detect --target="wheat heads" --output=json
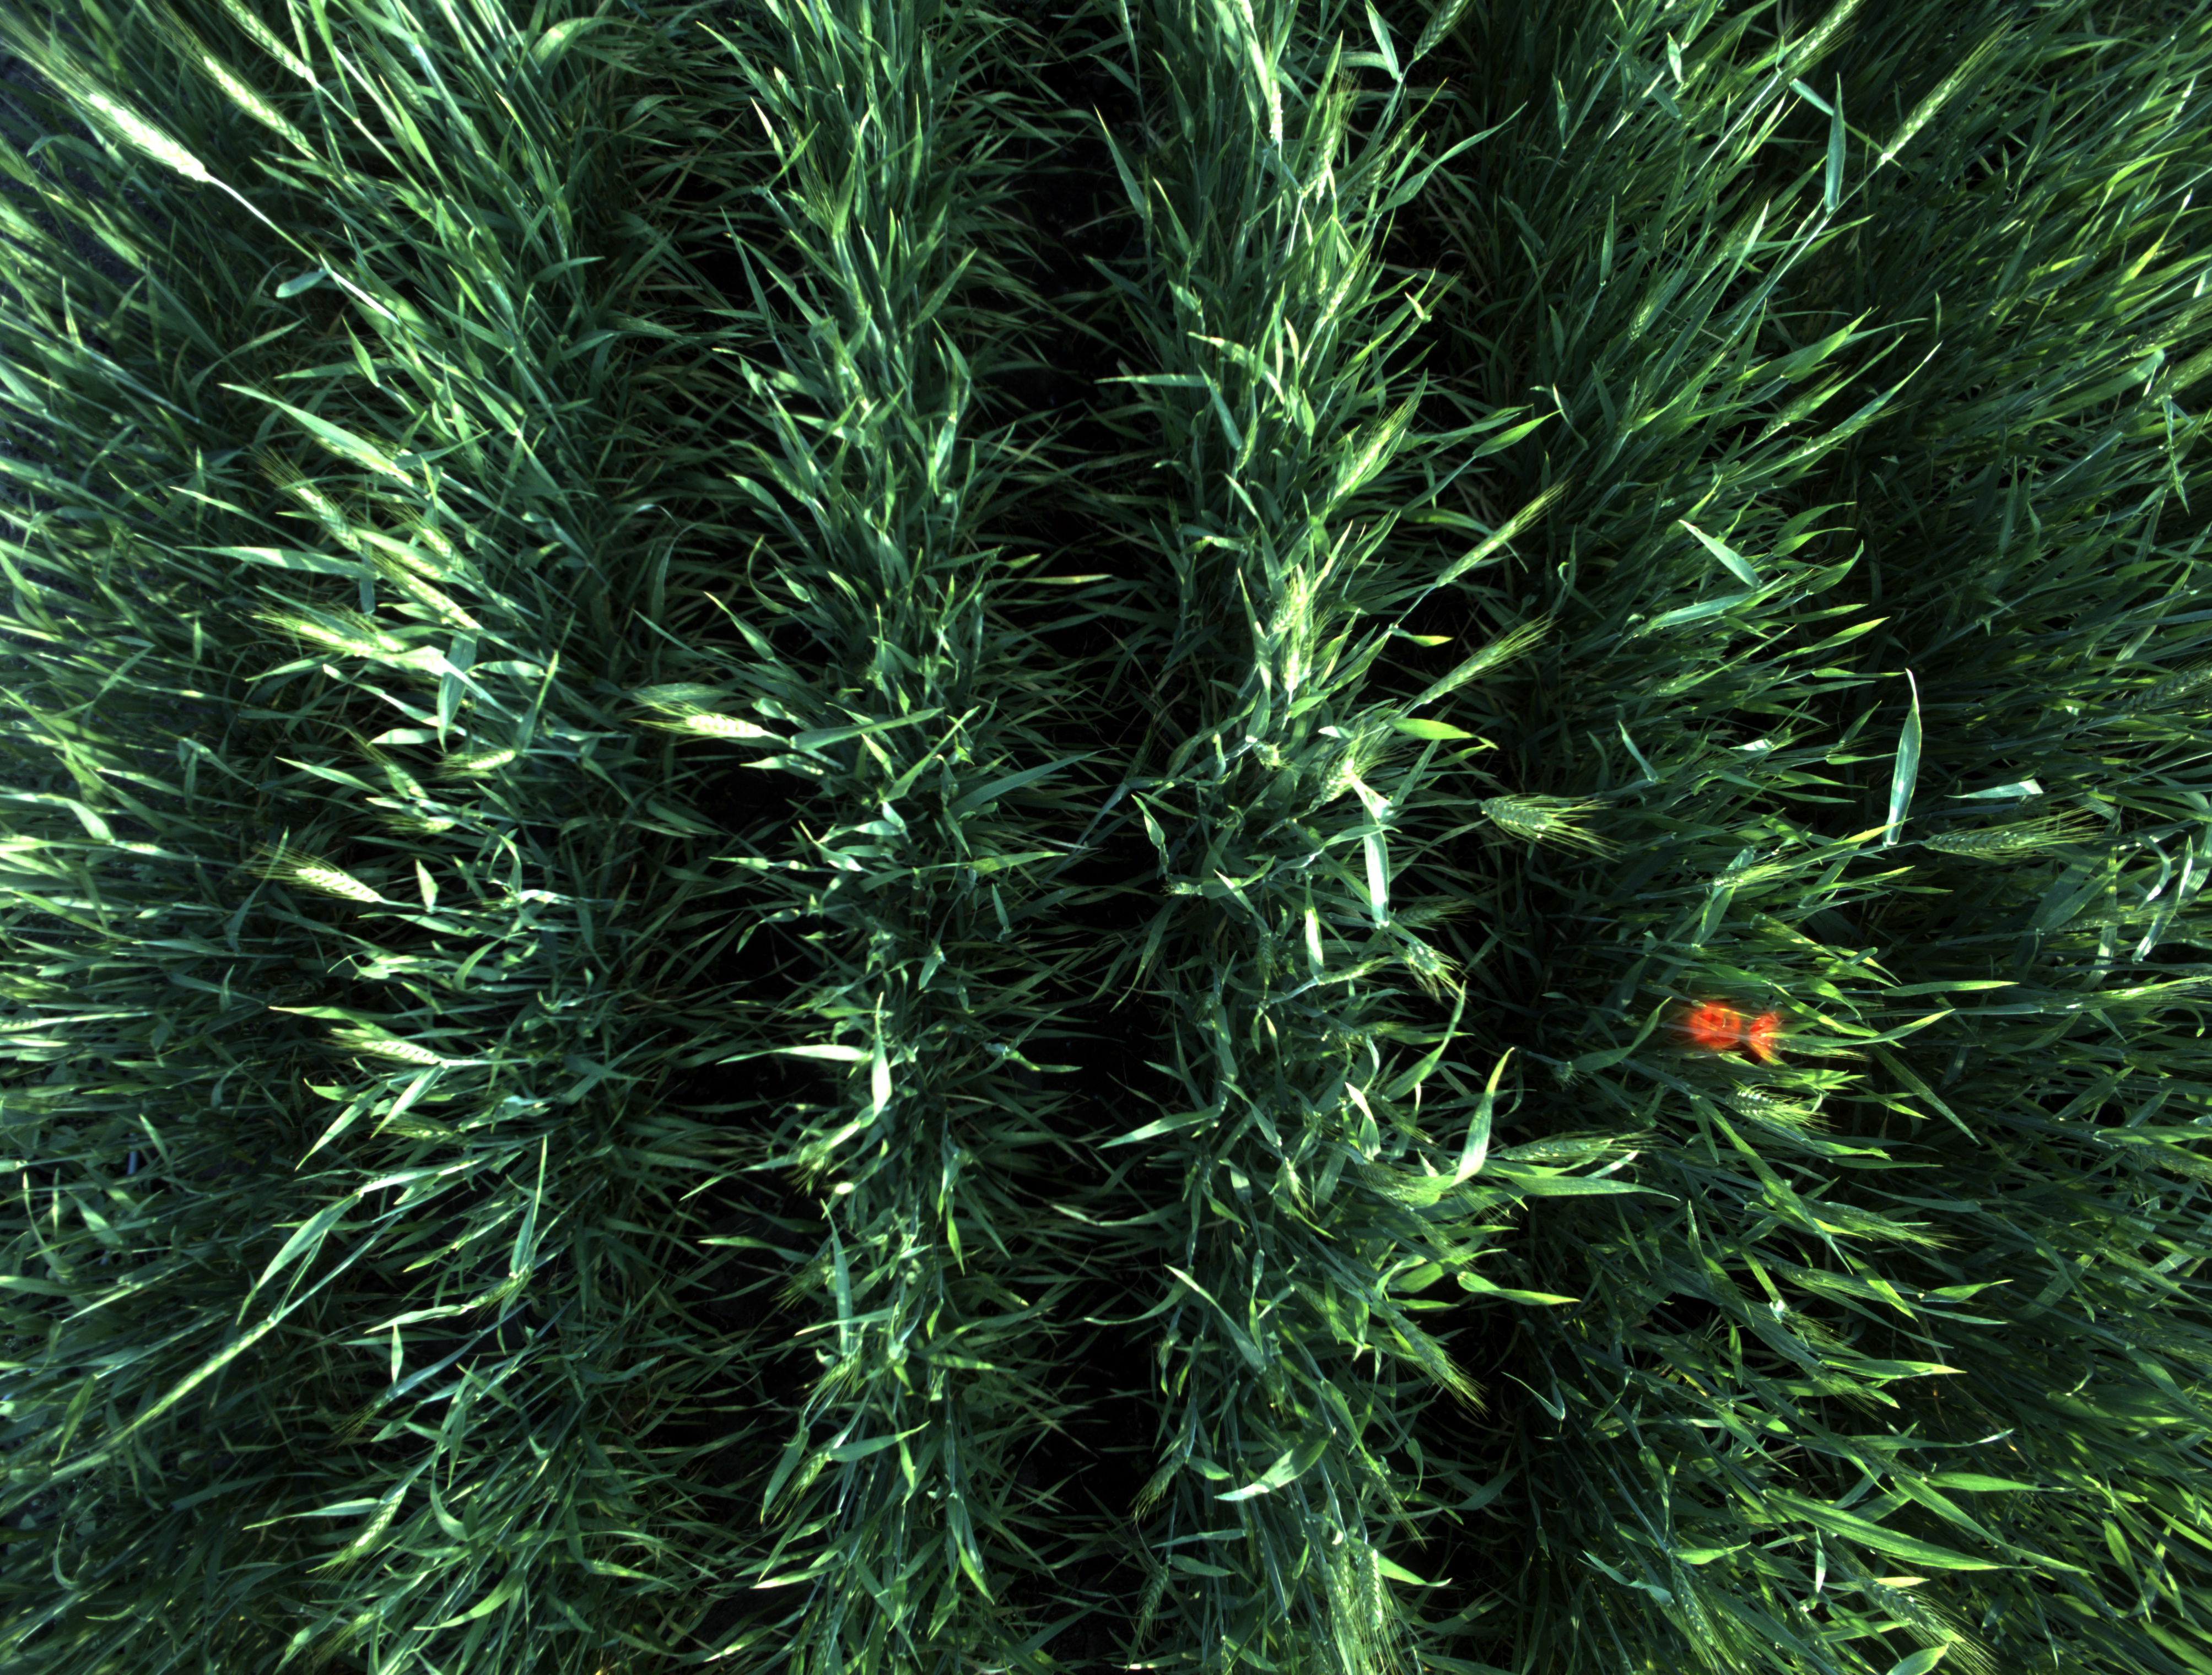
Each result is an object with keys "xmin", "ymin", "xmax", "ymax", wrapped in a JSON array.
[
  {"xmin": 367, "ymin": 530, "xmax": 459, "ymax": 582},
  {"xmin": 1281, "ymin": 1157, "xmax": 1310, "ymax": 1214},
  {"xmin": 1309, "ymin": 121, "xmax": 1340, "ymax": 199},
  {"xmin": 195, "ymin": 1302, "xmax": 289, "ymax": 1349},
  {"xmin": 2159, "ymin": 349, "xmax": 2212, "ymax": 394},
  {"xmin": 2110, "ymin": 1319, "xmax": 2203, "ymax": 1356},
  {"xmin": 1708, "ymin": 860, "xmax": 1776, "ymax": 890},
  {"xmin": 301, "ymin": 622, "xmax": 405, "ymax": 666},
  {"xmin": 294, "ymin": 480, "xmax": 362, "ymax": 558},
  {"xmin": 679, "ymin": 706, "xmax": 766, "ymax": 740},
  {"xmin": 779, "ymin": 109, "xmax": 801, "ymax": 146},
  {"xmin": 1371, "ymin": 1459, "xmax": 1404, "ymax": 1509},
  {"xmin": 793, "ymin": 1431, "xmax": 839, "ymax": 1499},
  {"xmin": 2139, "ymin": 312, "xmax": 2194, "ymax": 356},
  {"xmin": 386, "ymin": 757, "xmax": 430, "ymax": 797},
  {"xmin": 1336, "ymin": 1022, "xmax": 1389, "ymax": 1044},
  {"xmin": 347, "ymin": 1486, "xmax": 402, "ymax": 1558},
  {"xmin": 402, "ymin": 576, "xmax": 482, "ymax": 631},
  {"xmin": 1405, "ymin": 939, "xmax": 1444, "ymax": 983},
  {"xmin": 794, "ymin": 1263, "xmax": 837, "ymax": 1290},
  {"xmin": 1301, "ymin": 259, "xmax": 1358, "ymax": 361},
  {"xmin": 1664, "ymin": 1558, "xmax": 1721, "ymax": 1644},
  {"xmin": 1282, "ymin": 637, "xmax": 1304, "ymax": 697},
  {"xmin": 1290, "ymin": 1281, "xmax": 1330, "ymax": 1318},
  {"xmin": 350, "ymin": 1034, "xmax": 442, "ymax": 1064},
  {"xmin": 1229, "ymin": 410, "xmax": 1260, "ymax": 474},
  {"xmin": 1134, "ymin": 1570, "xmax": 1171, "ymax": 1629},
  {"xmin": 80, "ymin": 91, "xmax": 206, "ymax": 177},
  {"xmin": 2125, "ymin": 1141, "xmax": 2210, "ymax": 1176},
  {"xmin": 371, "ymin": 625, "xmax": 408, "ymax": 652},
  {"xmin": 472, "ymin": 1277, "xmax": 528, "ymax": 1307},
  {"xmin": 1327, "ymin": 428, "xmax": 1395, "ymax": 497},
  {"xmin": 1874, "ymin": 80, "xmax": 1963, "ymax": 167},
  {"xmin": 838, "ymin": 358, "xmax": 866, "ymax": 402},
  {"xmin": 1757, "ymin": 395, "xmax": 1821, "ymax": 445},
  {"xmin": 1263, "ymin": 1361, "xmax": 1290, "ymax": 1413},
  {"xmin": 932, "ymin": 411, "xmax": 959, "ymax": 470},
  {"xmin": 1380, "ymin": 1303, "xmax": 1447, "ymax": 1376},
  {"xmin": 1782, "ymin": 1307, "xmax": 1834, "ymax": 1336},
  {"xmin": 1390, "ymin": 1195, "xmax": 1448, "ymax": 1246},
  {"xmin": 1251, "ymin": 931, "xmax": 1278, "ymax": 982},
  {"xmin": 202, "ymin": 59, "xmax": 294, "ymax": 140},
  {"xmin": 814, "ymin": 1606, "xmax": 842, "ymax": 1669},
  {"xmin": 863, "ymin": 63, "xmax": 880, "ymax": 111},
  {"xmin": 1771, "ymin": 1257, "xmax": 1831, "ymax": 1286},
  {"xmin": 306, "ymin": 432, "xmax": 399, "ymax": 480},
  {"xmin": 1318, "ymin": 1561, "xmax": 1359, "ymax": 1662},
  {"xmin": 292, "ymin": 865, "xmax": 375, "ymax": 901},
  {"xmin": 1646, "ymin": 668, "xmax": 1699, "ymax": 697},
  {"xmin": 1677, "ymin": 60, "xmax": 1709, "ymax": 99},
  {"xmin": 1794, "ymin": 426, "xmax": 1853, "ymax": 459},
  {"xmin": 1821, "ymin": 1530, "xmax": 1929, "ymax": 1626},
  {"xmin": 469, "ymin": 745, "xmax": 518, "ymax": 773},
  {"xmin": 1925, "ymin": 821, "xmax": 2052, "ymax": 863},
  {"xmin": 0, "ymin": 1156, "xmax": 30, "ymax": 1177},
  {"xmin": 1261, "ymin": 568, "xmax": 1301, "ymax": 641},
  {"xmin": 2125, "ymin": 667, "xmax": 2208, "ymax": 714},
  {"xmin": 1490, "ymin": 1131, "xmax": 1592, "ymax": 1166},
  {"xmin": 2059, "ymin": 912, "xmax": 2132, "ymax": 934},
  {"xmin": 1362, "ymin": 1546, "xmax": 1385, "ymax": 1635},
  {"xmin": 1316, "ymin": 736, "xmax": 1358, "ymax": 805},
  {"xmin": 1410, "ymin": 640, "xmax": 1500, "ymax": 705},
  {"xmin": 1436, "ymin": 522, "xmax": 1521, "ymax": 585},
  {"xmin": 1358, "ymin": 1155, "xmax": 1411, "ymax": 1186},
  {"xmin": 772, "ymin": 463, "xmax": 813, "ymax": 502},
  {"xmin": 418, "ymin": 816, "xmax": 463, "ymax": 837},
  {"xmin": 1312, "ymin": 259, "xmax": 1327, "ymax": 306},
  {"xmin": 1835, "ymin": 1435, "xmax": 1920, "ymax": 1477},
  {"xmin": 1686, "ymin": 94, "xmax": 1715, "ymax": 124},
  {"xmin": 1724, "ymin": 1087, "xmax": 1777, "ymax": 1115},
  {"xmin": 1336, "ymin": 1546, "xmax": 1359, "ymax": 1625},
  {"xmin": 1473, "ymin": 794, "xmax": 1552, "ymax": 837},
  {"xmin": 1824, "ymin": 1197, "xmax": 1892, "ymax": 1228},
  {"xmin": 817, "ymin": 1352, "xmax": 857, "ymax": 1383},
  {"xmin": 221, "ymin": 4, "xmax": 315, "ymax": 72},
  {"xmin": 2, "ymin": 1014, "xmax": 27, "ymax": 1028},
  {"xmin": 1628, "ymin": 300, "xmax": 1654, "ymax": 328},
  {"xmin": 1337, "ymin": 149, "xmax": 1398, "ymax": 194},
  {"xmin": 1785, "ymin": 1, "xmax": 1861, "ymax": 66},
  {"xmin": 1134, "ymin": 1457, "xmax": 1187, "ymax": 1520},
  {"xmin": 420, "ymin": 526, "xmax": 466, "ymax": 563},
  {"xmin": 1413, "ymin": 2, "xmax": 1469, "ymax": 60}
]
